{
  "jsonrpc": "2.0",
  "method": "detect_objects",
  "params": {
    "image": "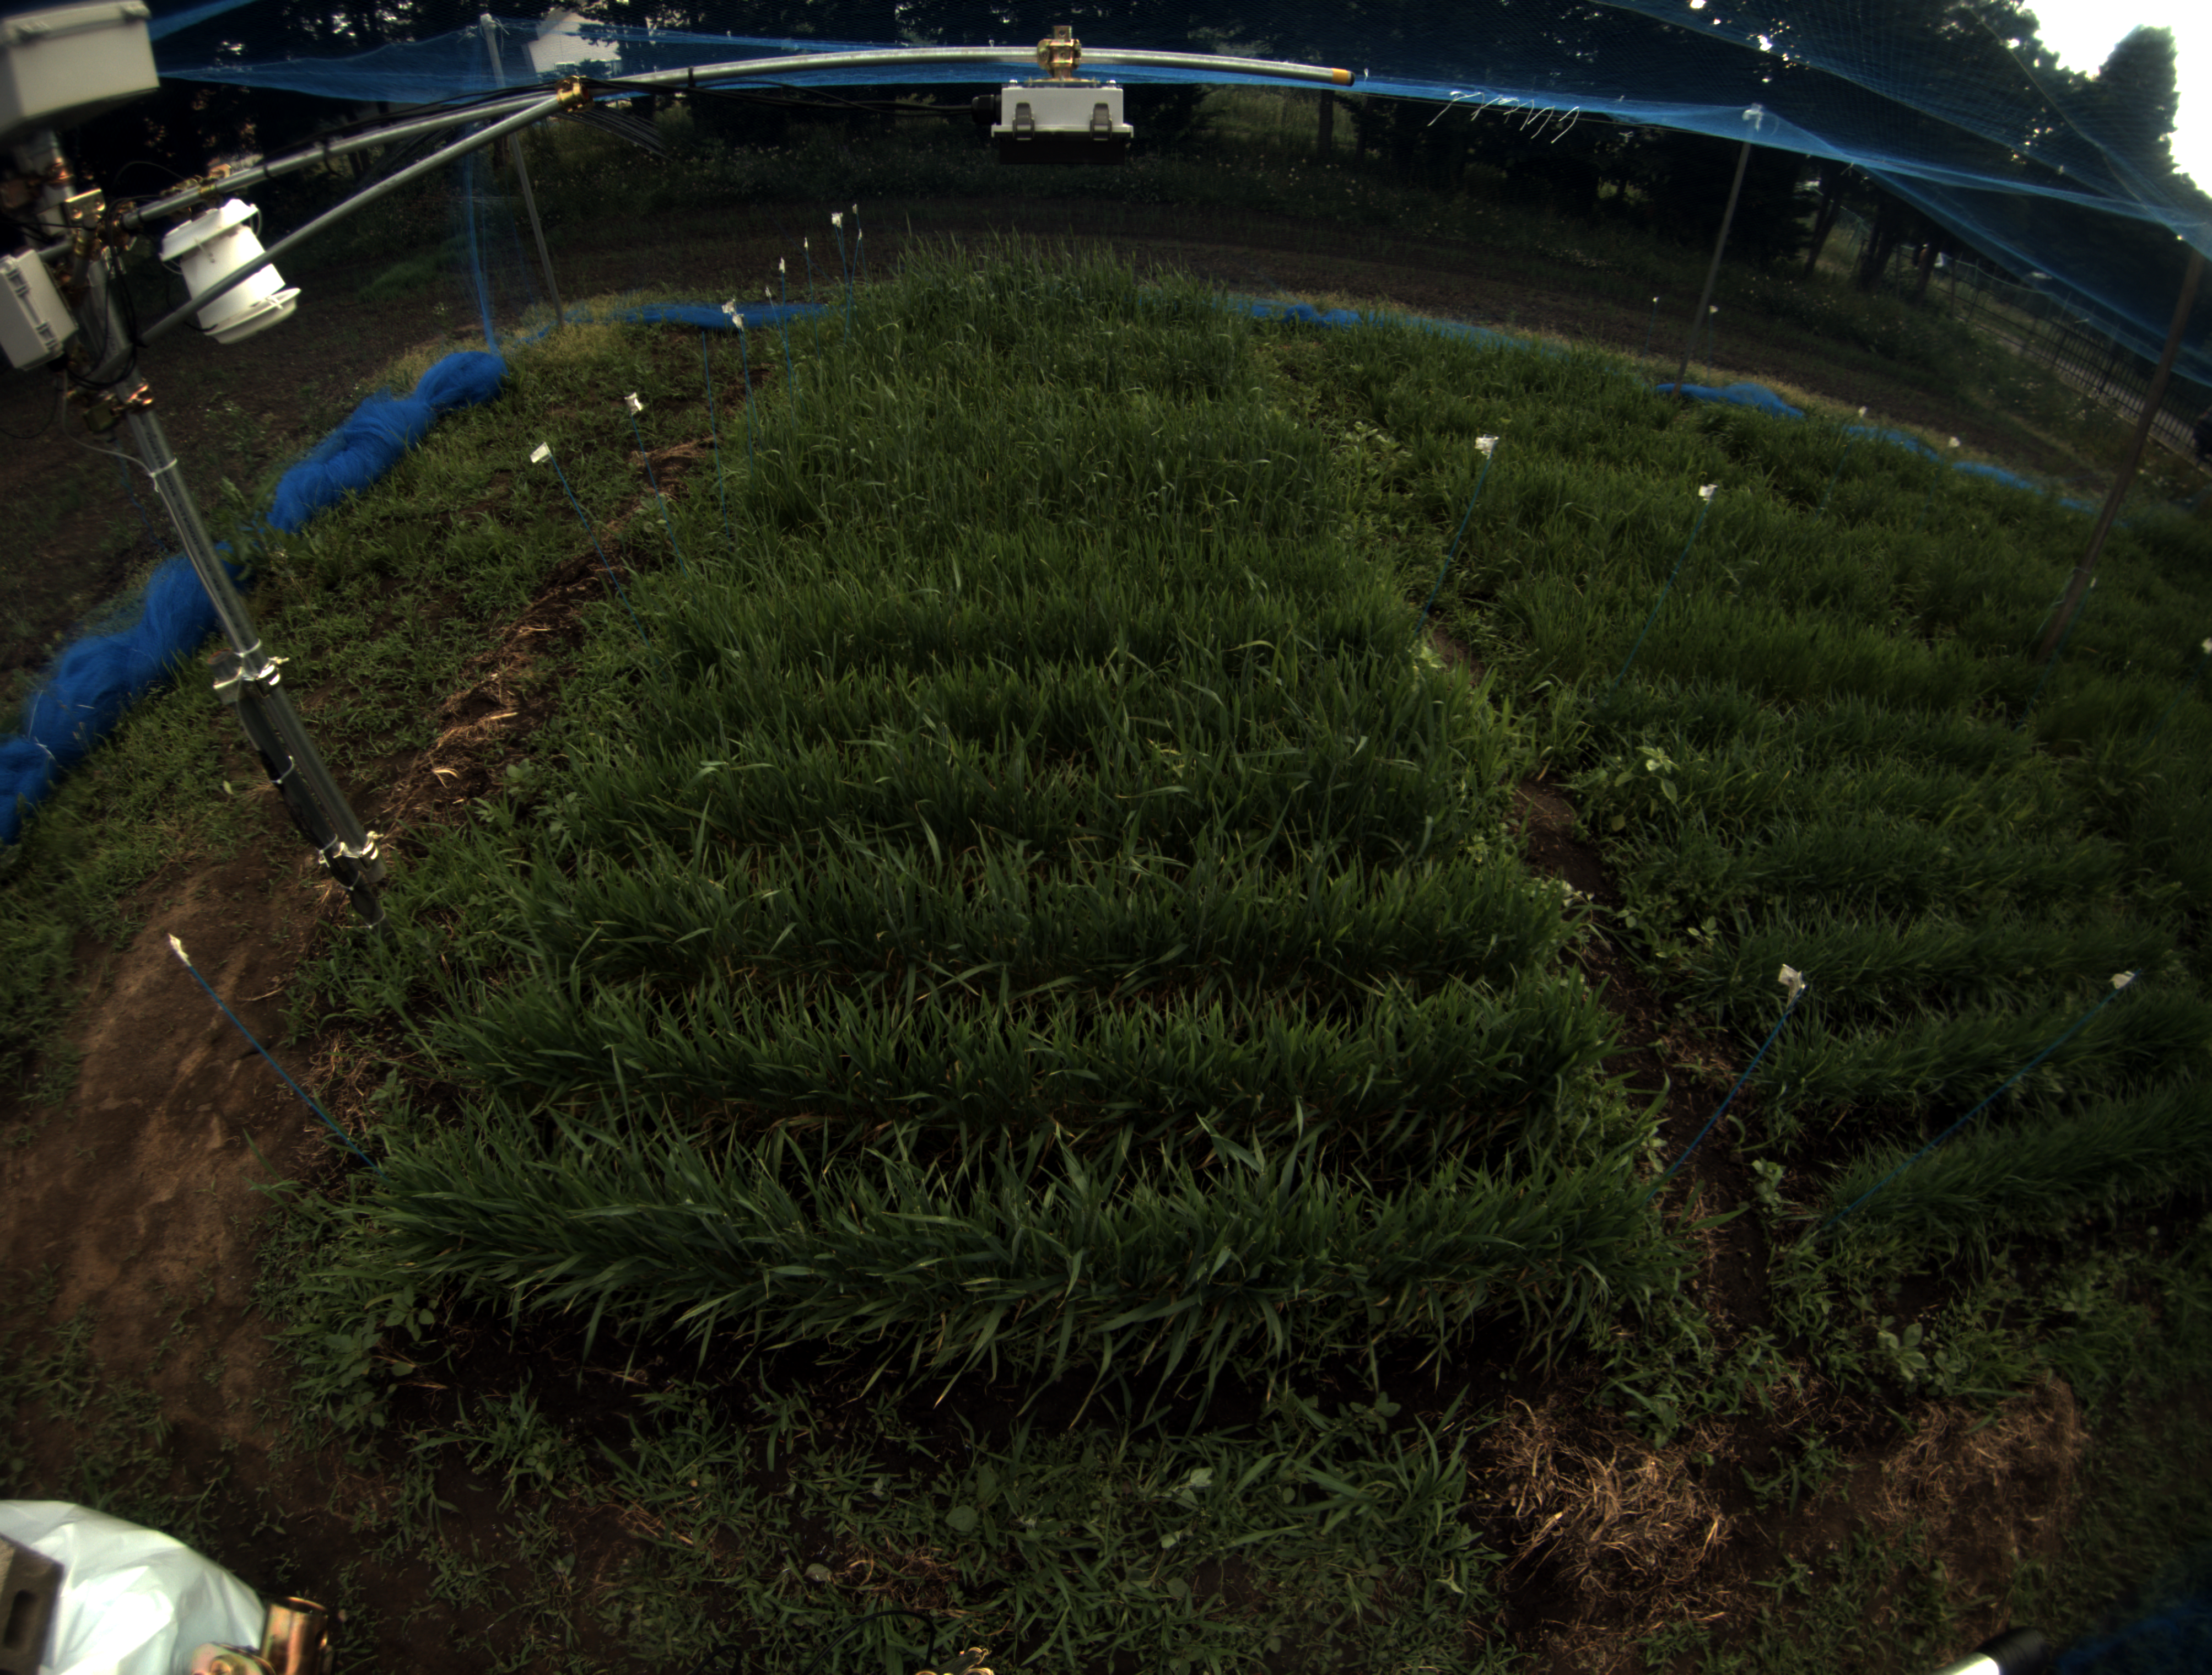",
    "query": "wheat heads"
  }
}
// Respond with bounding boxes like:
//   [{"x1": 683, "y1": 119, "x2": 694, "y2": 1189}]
[
  {"x1": 1076, "y1": 341, "x2": 1083, "y2": 355},
  {"x1": 1382, "y1": 570, "x2": 1389, "y2": 582},
  {"x1": 1919, "y1": 922, "x2": 1931, "y2": 936},
  {"x1": 773, "y1": 692, "x2": 779, "y2": 714},
  {"x1": 914, "y1": 440, "x2": 921, "y2": 461},
  {"x1": 496, "y1": 862, "x2": 511, "y2": 890},
  {"x1": 1239, "y1": 279, "x2": 1244, "y2": 295},
  {"x1": 1059, "y1": 410, "x2": 1064, "y2": 431},
  {"x1": 791, "y1": 1219, "x2": 806, "y2": 1245},
  {"x1": 835, "y1": 366, "x2": 846, "y2": 390},
  {"x1": 1249, "y1": 316, "x2": 1258, "y2": 329},
  {"x1": 874, "y1": 899, "x2": 886, "y2": 911},
  {"x1": 1945, "y1": 852, "x2": 1961, "y2": 859},
  {"x1": 1566, "y1": 994, "x2": 1572, "y2": 1006},
  {"x1": 998, "y1": 600, "x2": 1004, "y2": 615},
  {"x1": 564, "y1": 884, "x2": 571, "y2": 897},
  {"x1": 1539, "y1": 972, "x2": 1545, "y2": 984},
  {"x1": 1010, "y1": 744, "x2": 1017, "y2": 776},
  {"x1": 969, "y1": 445, "x2": 976, "y2": 467},
  {"x1": 891, "y1": 285, "x2": 904, "y2": 306},
  {"x1": 746, "y1": 667, "x2": 753, "y2": 693},
  {"x1": 1325, "y1": 469, "x2": 1330, "y2": 478},
  {"x1": 1358, "y1": 675, "x2": 1363, "y2": 688},
  {"x1": 838, "y1": 421, "x2": 846, "y2": 442},
  {"x1": 879, "y1": 393, "x2": 884, "y2": 412},
  {"x1": 1005, "y1": 619, "x2": 1011, "y2": 634},
  {"x1": 1217, "y1": 875, "x2": 1224, "y2": 901},
  {"x1": 1259, "y1": 442, "x2": 1265, "y2": 459},
  {"x1": 1259, "y1": 1168, "x2": 1269, "y2": 1199},
  {"x1": 1873, "y1": 565, "x2": 1882, "y2": 579},
  {"x1": 530, "y1": 841, "x2": 539, "y2": 864},
  {"x1": 1238, "y1": 1239, "x2": 1252, "y2": 1254},
  {"x1": 880, "y1": 570, "x2": 894, "y2": 589},
  {"x1": 906, "y1": 216, "x2": 912, "y2": 238},
  {"x1": 1119, "y1": 666, "x2": 1124, "y2": 697},
  {"x1": 1408, "y1": 631, "x2": 1416, "y2": 642},
  {"x1": 655, "y1": 842, "x2": 669, "y2": 868},
  {"x1": 658, "y1": 862, "x2": 667, "y2": 890},
  {"x1": 811, "y1": 389, "x2": 815, "y2": 401},
  {"x1": 1138, "y1": 407, "x2": 1144, "y2": 422},
  {"x1": 1767, "y1": 753, "x2": 1780, "y2": 771},
  {"x1": 547, "y1": 851, "x2": 554, "y2": 867},
  {"x1": 765, "y1": 646, "x2": 770, "y2": 668},
  {"x1": 1397, "y1": 631, "x2": 1403, "y2": 644},
  {"x1": 953, "y1": 432, "x2": 957, "y2": 445},
  {"x1": 1010, "y1": 1201, "x2": 1016, "y2": 1230},
  {"x1": 755, "y1": 646, "x2": 767, "y2": 673},
  {"x1": 555, "y1": 915, "x2": 568, "y2": 923},
  {"x1": 1213, "y1": 437, "x2": 1219, "y2": 450},
  {"x1": 2065, "y1": 995, "x2": 2072, "y2": 1014},
  {"x1": 1216, "y1": 471, "x2": 1227, "y2": 477},
  {"x1": 1392, "y1": 633, "x2": 1398, "y2": 646},
  {"x1": 1236, "y1": 308, "x2": 1248, "y2": 325},
  {"x1": 1107, "y1": 1237, "x2": 1115, "y2": 1259},
  {"x1": 1120, "y1": 871, "x2": 1128, "y2": 905},
  {"x1": 1090, "y1": 598, "x2": 1097, "y2": 615},
  {"x1": 1026, "y1": 1207, "x2": 1031, "y2": 1227},
  {"x1": 616, "y1": 1142, "x2": 635, "y2": 1167},
  {"x1": 856, "y1": 694, "x2": 861, "y2": 704},
  {"x1": 1204, "y1": 886, "x2": 1210, "y2": 915},
  {"x1": 1616, "y1": 1107, "x2": 1621, "y2": 1116},
  {"x1": 1087, "y1": 1211, "x2": 1096, "y2": 1227},
  {"x1": 1000, "y1": 1186, "x2": 1007, "y2": 1210},
  {"x1": 1176, "y1": 458, "x2": 1182, "y2": 473},
  {"x1": 1394, "y1": 643, "x2": 1402, "y2": 654},
  {"x1": 936, "y1": 380, "x2": 940, "y2": 397},
  {"x1": 840, "y1": 349, "x2": 846, "y2": 374},
  {"x1": 951, "y1": 235, "x2": 958, "y2": 253},
  {"x1": 803, "y1": 530, "x2": 806, "y2": 542},
  {"x1": 1930, "y1": 1015, "x2": 1943, "y2": 1036},
  {"x1": 1415, "y1": 632, "x2": 1425, "y2": 656},
  {"x1": 1250, "y1": 848, "x2": 1261, "y2": 879},
  {"x1": 1228, "y1": 410, "x2": 1233, "y2": 422},
  {"x1": 1310, "y1": 710, "x2": 1315, "y2": 721},
  {"x1": 1456, "y1": 1193, "x2": 1466, "y2": 1208},
  {"x1": 894, "y1": 304, "x2": 900, "y2": 320},
  {"x1": 1323, "y1": 442, "x2": 1328, "y2": 453},
  {"x1": 1534, "y1": 991, "x2": 1540, "y2": 1004},
  {"x1": 1104, "y1": 1246, "x2": 1111, "y2": 1262},
  {"x1": 754, "y1": 649, "x2": 760, "y2": 670},
  {"x1": 626, "y1": 988, "x2": 632, "y2": 998},
  {"x1": 756, "y1": 635, "x2": 762, "y2": 644},
  {"x1": 1084, "y1": 1204, "x2": 1091, "y2": 1226},
  {"x1": 1228, "y1": 1223, "x2": 1236, "y2": 1240},
  {"x1": 1863, "y1": 560, "x2": 1874, "y2": 568},
  {"x1": 1240, "y1": 446, "x2": 1245, "y2": 463}
]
